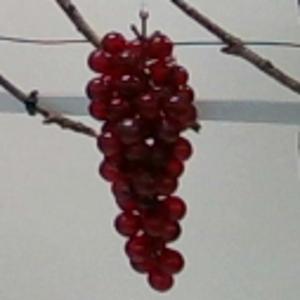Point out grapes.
Returning a JSON list of instances; mask_svg holds the SVG:
<instances>
[{
    "label": "grapes",
    "mask_w": 300,
    "mask_h": 300,
    "mask_svg": "<svg viewBox=\"0 0 300 300\" xmlns=\"http://www.w3.org/2000/svg\"><path fill=\"white\" fill-rule=\"evenodd\" d=\"M172 50L163 33L127 42L111 32L87 58L90 71L101 75L89 81L86 94L89 115L103 122L99 174L122 210L114 228L129 238L125 252L132 269L145 273L158 293L171 290L185 266L182 253L165 245L179 240L187 213L184 200L172 196L193 153L190 140L179 134L198 118L189 71Z\"/></svg>",
    "instance_id": "obj_1"
}]
</instances>
